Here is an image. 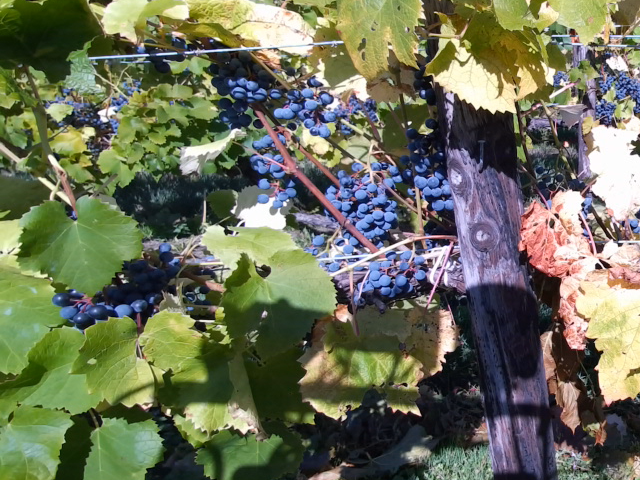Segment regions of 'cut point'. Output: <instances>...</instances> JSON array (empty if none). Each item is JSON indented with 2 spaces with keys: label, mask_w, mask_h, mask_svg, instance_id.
<instances>
[{
  "label": "cut point",
  "mask_w": 640,
  "mask_h": 480,
  "mask_svg": "<svg viewBox=\"0 0 640 480\" xmlns=\"http://www.w3.org/2000/svg\"><path fill=\"white\" fill-rule=\"evenodd\" d=\"M342 228H343V223H340L336 231L327 239L328 244L333 245V241L331 240H333V238L337 236V234L341 231Z\"/></svg>",
  "instance_id": "cut-point-1"
}]
</instances>
